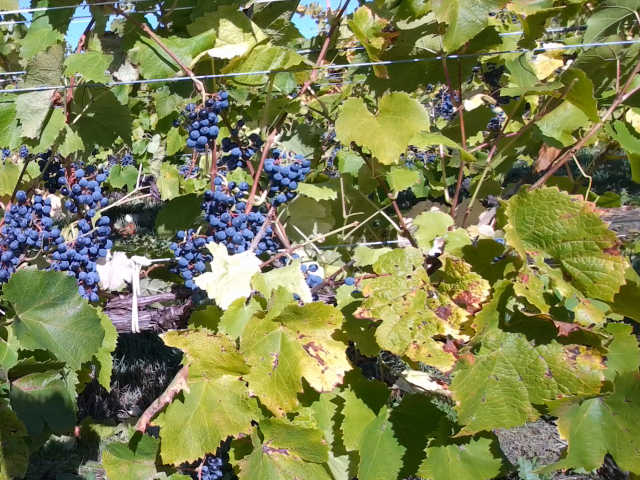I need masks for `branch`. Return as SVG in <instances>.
Returning a JSON list of instances; mask_svg holds the SVG:
<instances>
[{
  "label": "branch",
  "mask_w": 640,
  "mask_h": 480,
  "mask_svg": "<svg viewBox=\"0 0 640 480\" xmlns=\"http://www.w3.org/2000/svg\"><path fill=\"white\" fill-rule=\"evenodd\" d=\"M287 116H288V113L284 112L280 116V118L278 119L274 129L271 131V133L269 135V138H268V141L266 143V146L263 148L262 157H261V159H260V161L258 163V166H257V169H256V173L254 172V169H253V166H252V162L249 159L245 160V163L247 164V168H248L249 174H250L252 180L254 181L253 184H252L251 191H250V194H249V197H248V201H247V205H246V208H245V213L246 214L250 213V210H251V207H252V203H253V199H254V196L256 194V190H257V192L259 194L263 193V189H262V186H261L260 181H259V179L261 177L262 168H263L264 163H265V161L267 159L268 151L270 150V148H271V146L273 144L274 137L276 136V134L280 130V128H281L284 120L287 118Z\"/></svg>",
  "instance_id": "branch-1"
},
{
  "label": "branch",
  "mask_w": 640,
  "mask_h": 480,
  "mask_svg": "<svg viewBox=\"0 0 640 480\" xmlns=\"http://www.w3.org/2000/svg\"><path fill=\"white\" fill-rule=\"evenodd\" d=\"M350 146L351 148L356 152V154L360 157V159L363 161L364 165L367 167V169L369 170V172L377 179L378 182H380L381 186L384 188L385 192L388 194L389 199L392 202V206L396 212V215L400 221L401 227L403 228L405 237L407 239V241L410 243V245L413 248H418L419 244L416 243L414 241V239L411 237V234L409 232L408 226L406 225V221L402 215V212L398 206L397 200L395 198V196L393 195V192L391 191V189L389 188V186L387 185V183L385 182V180L378 174V172L372 167V165L370 164L369 160L367 159V157L363 154V152L358 148V146L356 145V143L354 141L350 142Z\"/></svg>",
  "instance_id": "branch-2"
},
{
  "label": "branch",
  "mask_w": 640,
  "mask_h": 480,
  "mask_svg": "<svg viewBox=\"0 0 640 480\" xmlns=\"http://www.w3.org/2000/svg\"><path fill=\"white\" fill-rule=\"evenodd\" d=\"M107 7L113 11H115L116 13L122 15L123 17H125L127 20L131 21L132 23L136 24L138 27H140L141 29H143L150 37L153 41H155L157 44H159L161 46V48L167 53L169 54L174 61H176V63L183 69L186 71V73L193 77L194 76V72L157 36L155 35V33L143 22H141L139 19L134 18L133 16L129 15L126 11L120 9L119 7L108 3Z\"/></svg>",
  "instance_id": "branch-3"
},
{
  "label": "branch",
  "mask_w": 640,
  "mask_h": 480,
  "mask_svg": "<svg viewBox=\"0 0 640 480\" xmlns=\"http://www.w3.org/2000/svg\"><path fill=\"white\" fill-rule=\"evenodd\" d=\"M600 127H601V124L600 123H596L592 127L590 132L584 138H582L577 144H575L559 161H557L551 167V169H549L546 172V174L543 176L542 179H540L535 184H533L531 186H528L527 190L528 191H533V190L537 189L538 187H540L542 184L546 183L547 180L551 177V175L558 169V167L562 166L579 148H581L586 142H588L595 135L596 131Z\"/></svg>",
  "instance_id": "branch-4"
},
{
  "label": "branch",
  "mask_w": 640,
  "mask_h": 480,
  "mask_svg": "<svg viewBox=\"0 0 640 480\" xmlns=\"http://www.w3.org/2000/svg\"><path fill=\"white\" fill-rule=\"evenodd\" d=\"M457 64V113L459 117V124L461 128V146L463 150L467 149L466 143V125L464 122V114L462 111V62L461 59H456Z\"/></svg>",
  "instance_id": "branch-5"
},
{
  "label": "branch",
  "mask_w": 640,
  "mask_h": 480,
  "mask_svg": "<svg viewBox=\"0 0 640 480\" xmlns=\"http://www.w3.org/2000/svg\"><path fill=\"white\" fill-rule=\"evenodd\" d=\"M350 3H351V0H346L344 2L343 6L340 8V10L337 12L335 18L333 19V22H332V24L330 25V28H329V33L327 34V37H326V39H325V41H324V43H323V45H322V47H321V49H320V51L318 53L317 60L315 61V65L316 66L318 64H321L322 58H323V56H324V54L326 52V49H327V47H328V45L331 42V39L333 37L334 30H335L336 26L338 25V22H339L341 16L347 10V8L350 5Z\"/></svg>",
  "instance_id": "branch-6"
},
{
  "label": "branch",
  "mask_w": 640,
  "mask_h": 480,
  "mask_svg": "<svg viewBox=\"0 0 640 480\" xmlns=\"http://www.w3.org/2000/svg\"><path fill=\"white\" fill-rule=\"evenodd\" d=\"M264 206L267 208L268 212L270 213L271 217L273 218V223L271 225V228L277 233V235L279 236L280 241L282 242V245L284 246L285 249H288L291 246L290 240L287 236V231L285 230V228L283 227V225L280 223L279 221V217L278 215L275 213V211L273 210L272 206L270 205L268 200H264L263 201Z\"/></svg>",
  "instance_id": "branch-7"
},
{
  "label": "branch",
  "mask_w": 640,
  "mask_h": 480,
  "mask_svg": "<svg viewBox=\"0 0 640 480\" xmlns=\"http://www.w3.org/2000/svg\"><path fill=\"white\" fill-rule=\"evenodd\" d=\"M640 68V61H638L632 72L630 73V75L628 76V79L624 82V85L622 87V89L619 91V93L616 95V97L614 98V100L612 101L611 105L602 113V115L600 116V121L604 122L605 119L607 118V116L615 109V107L617 106L618 102L620 101V99L622 98V96L624 95V93L628 90L629 85L631 84V82L633 81L634 77L636 76V74L638 73Z\"/></svg>",
  "instance_id": "branch-8"
},
{
  "label": "branch",
  "mask_w": 640,
  "mask_h": 480,
  "mask_svg": "<svg viewBox=\"0 0 640 480\" xmlns=\"http://www.w3.org/2000/svg\"><path fill=\"white\" fill-rule=\"evenodd\" d=\"M464 165H465V161L461 160L459 162V165H458V178H457L456 188H455L454 195H453V202H452L451 207H450V216L451 217L455 216V209H456V206L458 204V198H459L460 189H461V185H462V181H463V168H464Z\"/></svg>",
  "instance_id": "branch-9"
},
{
  "label": "branch",
  "mask_w": 640,
  "mask_h": 480,
  "mask_svg": "<svg viewBox=\"0 0 640 480\" xmlns=\"http://www.w3.org/2000/svg\"><path fill=\"white\" fill-rule=\"evenodd\" d=\"M31 160H32V154H31V153H28V154H27V158H26L25 162L23 163V166H22V168H21V170H20V173H19V175H18V176H17V178H16V181H15V183H14L13 189H12V191L10 192V195H9V202H10V203H13V202H14V198H15V195H16V193H17L18 189H19V186H20L21 180H22V178L24 177L25 172H26V170H27L28 166H29V165H30V163H31Z\"/></svg>",
  "instance_id": "branch-10"
},
{
  "label": "branch",
  "mask_w": 640,
  "mask_h": 480,
  "mask_svg": "<svg viewBox=\"0 0 640 480\" xmlns=\"http://www.w3.org/2000/svg\"><path fill=\"white\" fill-rule=\"evenodd\" d=\"M93 24H94V20H93V19H90V20L88 21L87 25L84 27V29H83V31H82V34H81V37H80V40L78 41V45H77V47H76V52H77V53H80V52H81V50H82V48H83V44H84V42H85V40H86V37H87V33H88V32H89V30L92 28V25H93Z\"/></svg>",
  "instance_id": "branch-11"
},
{
  "label": "branch",
  "mask_w": 640,
  "mask_h": 480,
  "mask_svg": "<svg viewBox=\"0 0 640 480\" xmlns=\"http://www.w3.org/2000/svg\"><path fill=\"white\" fill-rule=\"evenodd\" d=\"M67 92H68V95L65 100V118H64L65 123H68L70 120V103L73 98V89H67Z\"/></svg>",
  "instance_id": "branch-12"
},
{
  "label": "branch",
  "mask_w": 640,
  "mask_h": 480,
  "mask_svg": "<svg viewBox=\"0 0 640 480\" xmlns=\"http://www.w3.org/2000/svg\"><path fill=\"white\" fill-rule=\"evenodd\" d=\"M317 75V70L316 69H312L309 76L307 77L306 81L304 82L303 86L301 87L299 94L303 95L305 93V91L307 90L309 84L311 83V81L313 80V78Z\"/></svg>",
  "instance_id": "branch-13"
},
{
  "label": "branch",
  "mask_w": 640,
  "mask_h": 480,
  "mask_svg": "<svg viewBox=\"0 0 640 480\" xmlns=\"http://www.w3.org/2000/svg\"><path fill=\"white\" fill-rule=\"evenodd\" d=\"M219 117L224 121L226 128H227L228 130H231V129H232V126H231V123H230V121H229L228 117H227L225 114H223V113H220V114H219Z\"/></svg>",
  "instance_id": "branch-14"
}]
</instances>
